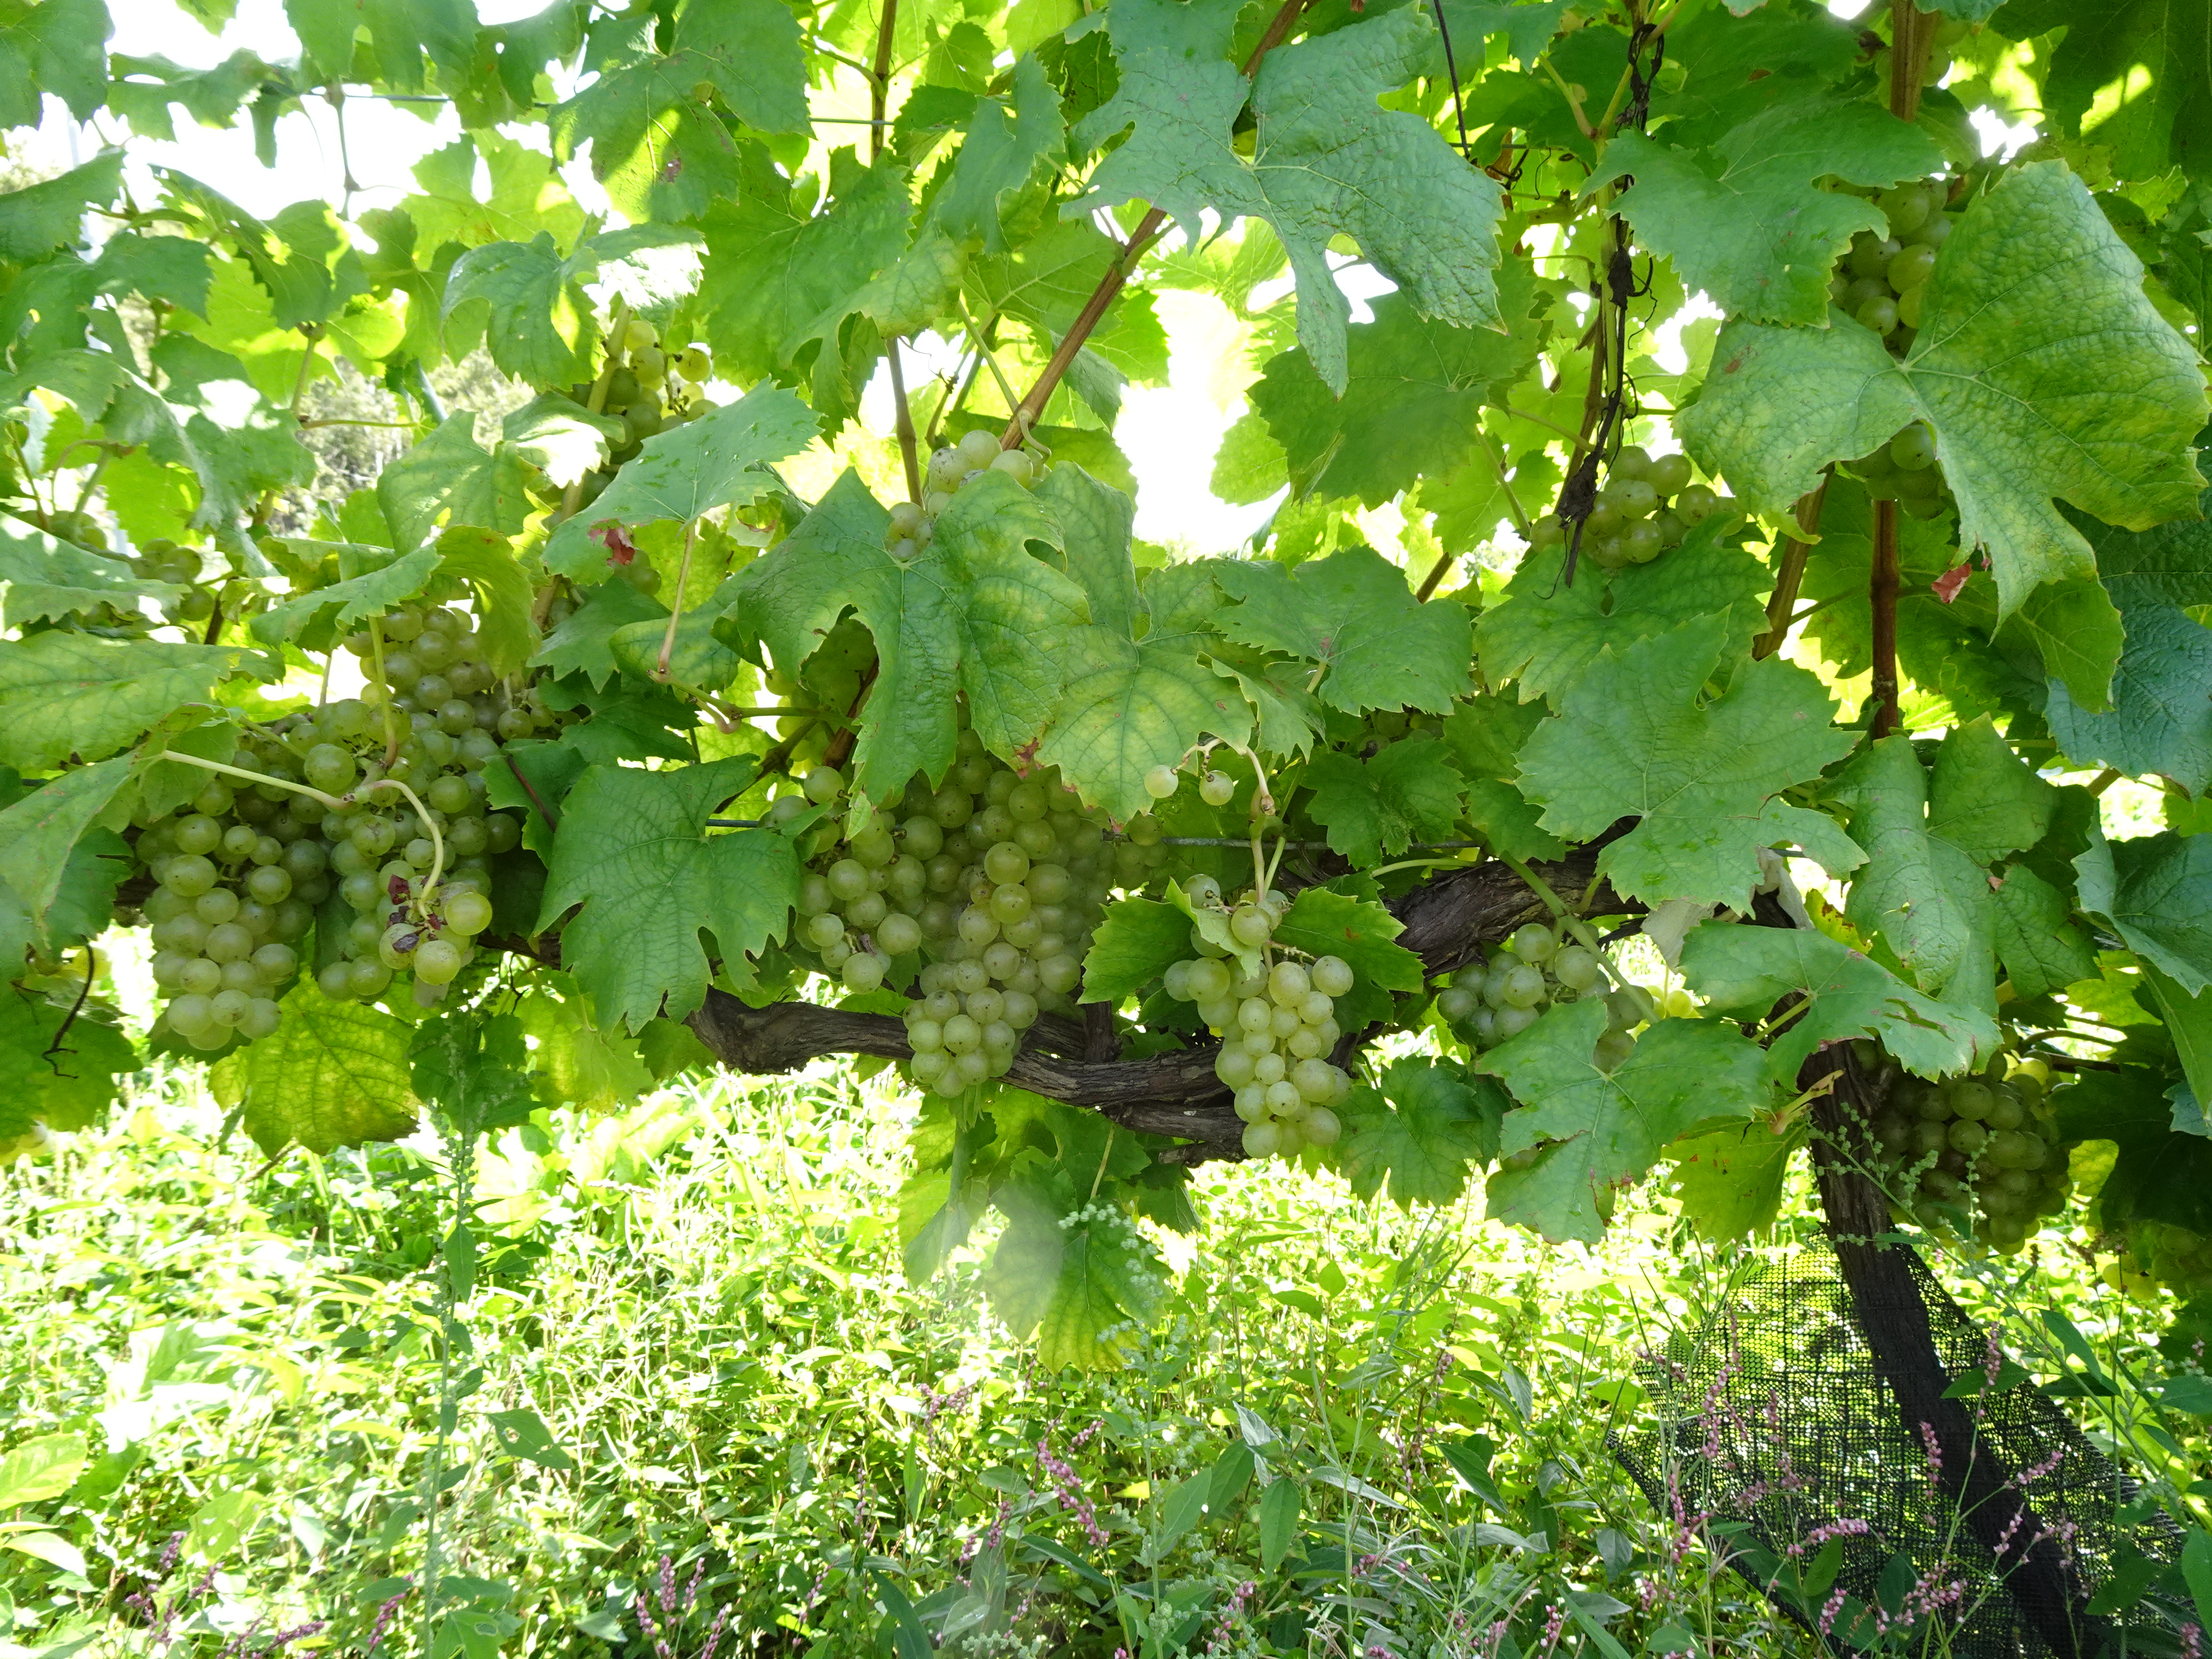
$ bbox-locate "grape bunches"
[1854,1036,2085,1260]
[1633,985,1698,1041]
[758,691,1024,994]
[1875,19,1966,110]
[887,424,1055,565]
[130,729,331,1050]
[272,698,520,1003]
[1526,443,1720,569]
[904,756,1173,1099]
[562,323,724,518]
[15,510,215,620]
[342,602,521,877]
[1437,923,1653,1172]
[1164,874,1355,1160]
[1143,763,1235,806]
[2103,1218,2210,1303]
[1817,174,1966,518]
[469,677,580,742]
[377,878,494,986]
[763,618,879,750]
[546,549,662,629]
